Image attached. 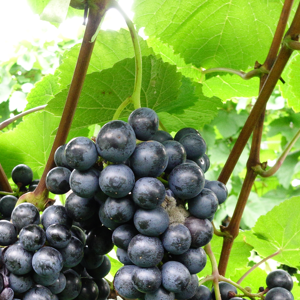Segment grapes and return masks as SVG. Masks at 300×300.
<instances>
[{
  "instance_id": "0513c4c2",
  "label": "grapes",
  "mask_w": 300,
  "mask_h": 300,
  "mask_svg": "<svg viewBox=\"0 0 300 300\" xmlns=\"http://www.w3.org/2000/svg\"><path fill=\"white\" fill-rule=\"evenodd\" d=\"M10 179L14 185L18 187H25L31 183L33 179V172L29 166L25 164H18L12 168L10 172Z\"/></svg>"
},
{
  "instance_id": "01657485",
  "label": "grapes",
  "mask_w": 300,
  "mask_h": 300,
  "mask_svg": "<svg viewBox=\"0 0 300 300\" xmlns=\"http://www.w3.org/2000/svg\"><path fill=\"white\" fill-rule=\"evenodd\" d=\"M158 125L157 113L140 107L128 122L106 123L96 143L78 136L61 145L45 185L73 191L65 208L41 214L0 199V300H108L114 244L125 265L114 287L126 300H242L235 285L210 291L195 274L228 196L224 183L205 180L203 136L185 127L173 139Z\"/></svg>"
},
{
  "instance_id": "b958b902",
  "label": "grapes",
  "mask_w": 300,
  "mask_h": 300,
  "mask_svg": "<svg viewBox=\"0 0 300 300\" xmlns=\"http://www.w3.org/2000/svg\"><path fill=\"white\" fill-rule=\"evenodd\" d=\"M269 290L265 295V300H294L291 289L294 281L289 272L285 270H275L269 273L266 278Z\"/></svg>"
}]
</instances>
